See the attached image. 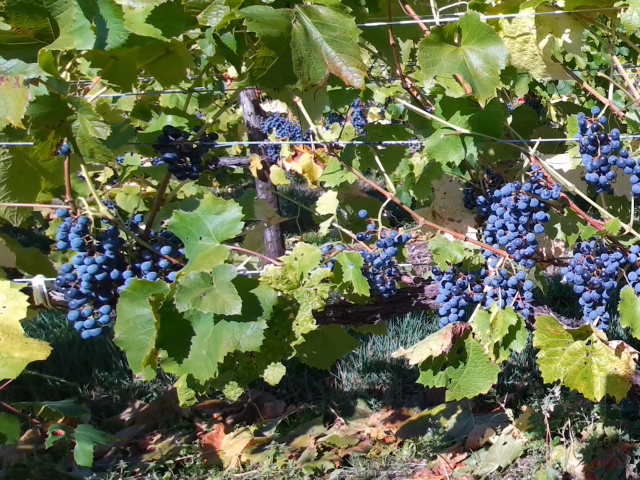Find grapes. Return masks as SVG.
Here are the masks:
<instances>
[{
  "mask_svg": "<svg viewBox=\"0 0 640 480\" xmlns=\"http://www.w3.org/2000/svg\"><path fill=\"white\" fill-rule=\"evenodd\" d=\"M640 266H637L635 270H631L626 274V280L630 282V285L635 289L637 293H640Z\"/></svg>",
  "mask_w": 640,
  "mask_h": 480,
  "instance_id": "1ff8f66d",
  "label": "grapes"
},
{
  "mask_svg": "<svg viewBox=\"0 0 640 480\" xmlns=\"http://www.w3.org/2000/svg\"><path fill=\"white\" fill-rule=\"evenodd\" d=\"M336 257H332L329 259L328 263L323 264V269L329 268V270H333L336 264Z\"/></svg>",
  "mask_w": 640,
  "mask_h": 480,
  "instance_id": "91a60905",
  "label": "grapes"
},
{
  "mask_svg": "<svg viewBox=\"0 0 640 480\" xmlns=\"http://www.w3.org/2000/svg\"><path fill=\"white\" fill-rule=\"evenodd\" d=\"M534 288V283L530 280H525L522 285L523 298L518 299L515 303V308L520 310V313L523 317H529L531 315V306H532V298L533 293L531 290Z\"/></svg>",
  "mask_w": 640,
  "mask_h": 480,
  "instance_id": "ef6de9ee",
  "label": "grapes"
},
{
  "mask_svg": "<svg viewBox=\"0 0 640 480\" xmlns=\"http://www.w3.org/2000/svg\"><path fill=\"white\" fill-rule=\"evenodd\" d=\"M162 132L158 136V140L152 145L155 152H161L163 161L168 165V171L172 173L179 181H185L188 177L190 180H197L198 173L203 171L201 164V155L208 153L214 145H198L195 148H185L184 152L181 147L171 145V139H188L189 133L180 129L164 125Z\"/></svg>",
  "mask_w": 640,
  "mask_h": 480,
  "instance_id": "5460f4e3",
  "label": "grapes"
},
{
  "mask_svg": "<svg viewBox=\"0 0 640 480\" xmlns=\"http://www.w3.org/2000/svg\"><path fill=\"white\" fill-rule=\"evenodd\" d=\"M480 252L484 258L489 259V265L491 267H496L501 260V255L493 253L485 248H480Z\"/></svg>",
  "mask_w": 640,
  "mask_h": 480,
  "instance_id": "54f908b8",
  "label": "grapes"
},
{
  "mask_svg": "<svg viewBox=\"0 0 640 480\" xmlns=\"http://www.w3.org/2000/svg\"><path fill=\"white\" fill-rule=\"evenodd\" d=\"M141 262H134L132 267L134 269H140L141 276L149 282H154L158 279V272L151 270L153 268V261L155 260L154 253L149 249H144L141 253Z\"/></svg>",
  "mask_w": 640,
  "mask_h": 480,
  "instance_id": "2adb6a1f",
  "label": "grapes"
},
{
  "mask_svg": "<svg viewBox=\"0 0 640 480\" xmlns=\"http://www.w3.org/2000/svg\"><path fill=\"white\" fill-rule=\"evenodd\" d=\"M411 238L412 234L410 232H403L399 235V231L394 230L389 233V236L383 234L381 239L375 241V246L382 249V253H373L366 248L358 250V253L366 263H372L373 270H368L365 273V277L374 282V286L383 298L398 294L395 281L392 279L399 272V268L396 267L395 261L392 259L393 256L398 254V248L394 243H406Z\"/></svg>",
  "mask_w": 640,
  "mask_h": 480,
  "instance_id": "83cd7487",
  "label": "grapes"
},
{
  "mask_svg": "<svg viewBox=\"0 0 640 480\" xmlns=\"http://www.w3.org/2000/svg\"><path fill=\"white\" fill-rule=\"evenodd\" d=\"M529 180L507 182L504 186L486 188V195L474 184L466 182L463 189V202L468 210L478 205L479 215H488L484 229L485 241L500 248L506 245V252L513 254V260L520 266L533 268L536 259L532 257L538 247L535 234L545 231L540 223L533 225V232L527 230L529 221L548 223L550 214L544 211L534 212L530 208H544L546 203L525 192L539 195L542 200L558 199L562 194V184L555 182L552 189L541 184L543 172L536 163L530 165Z\"/></svg>",
  "mask_w": 640,
  "mask_h": 480,
  "instance_id": "b958b902",
  "label": "grapes"
},
{
  "mask_svg": "<svg viewBox=\"0 0 640 480\" xmlns=\"http://www.w3.org/2000/svg\"><path fill=\"white\" fill-rule=\"evenodd\" d=\"M577 120L578 132L573 135L576 143H581L579 153L581 154V161L585 165V180L595 185V191L600 193L602 191L609 192L612 189V185L609 181L617 177V173L610 169V166H615L623 170L629 177V182L632 184L631 191L634 195H640V157L636 160L629 156V152L626 148H620L618 155L610 154L612 149H618L621 146L620 136L621 131L618 127H613L610 132V142L608 141V135L605 131L596 133L600 129V124L605 125L608 122L606 116H601L598 122H591L588 126V120L584 112H578L575 115ZM598 140L600 142V152L603 154L598 160H594V156L598 152Z\"/></svg>",
  "mask_w": 640,
  "mask_h": 480,
  "instance_id": "84f90ec7",
  "label": "grapes"
},
{
  "mask_svg": "<svg viewBox=\"0 0 640 480\" xmlns=\"http://www.w3.org/2000/svg\"><path fill=\"white\" fill-rule=\"evenodd\" d=\"M163 237L169 238L166 243L154 242L152 249L160 253V257L157 259L156 267L158 269H168L170 267V261L164 257V255L170 254L174 258H179L186 253V250L179 245L182 240L169 230H163L161 232Z\"/></svg>",
  "mask_w": 640,
  "mask_h": 480,
  "instance_id": "e5b3c951",
  "label": "grapes"
},
{
  "mask_svg": "<svg viewBox=\"0 0 640 480\" xmlns=\"http://www.w3.org/2000/svg\"><path fill=\"white\" fill-rule=\"evenodd\" d=\"M56 215L64 218L63 223L57 226L55 239L58 240L59 250L79 252L71 257V263L65 262L60 266V272L54 278V288L57 291H65L63 299L68 302L70 309H77L89 300V297L103 303L97 312L101 315L97 319L88 317L94 314L92 309L71 310L67 314V320L75 331L80 332L82 340L98 337L103 328L111 322V305L105 303L111 299V290L115 288L117 293L122 292L133 278V272L125 262V255L118 252L125 244L121 230L115 226L107 227L105 235H98L96 240L97 252L103 255L95 257L92 250L93 244L82 238L90 233L88 226L91 219L87 216H79L75 224L68 209H57Z\"/></svg>",
  "mask_w": 640,
  "mask_h": 480,
  "instance_id": "01657485",
  "label": "grapes"
},
{
  "mask_svg": "<svg viewBox=\"0 0 640 480\" xmlns=\"http://www.w3.org/2000/svg\"><path fill=\"white\" fill-rule=\"evenodd\" d=\"M433 281L439 283V293L436 297L437 303H443L439 308L441 315L439 327L444 328L452 322H457L458 317H463L471 300L473 302L485 301V306L490 307L493 304V296L496 288L500 287L501 298L497 300V307L505 308L515 299L517 285L519 281L526 278V272L519 270L516 275L509 276L507 268H500L498 276H486L484 285L490 286L487 293H483L484 286L476 283L475 271H463L462 275L465 279H458L454 273V268L442 271L439 267L432 268Z\"/></svg>",
  "mask_w": 640,
  "mask_h": 480,
  "instance_id": "f8a65327",
  "label": "grapes"
},
{
  "mask_svg": "<svg viewBox=\"0 0 640 480\" xmlns=\"http://www.w3.org/2000/svg\"><path fill=\"white\" fill-rule=\"evenodd\" d=\"M573 252L574 259L569 261V267L563 266L561 274L569 284H574L573 291L582 294L579 304L583 306L582 319L597 321L598 329H607L610 314L606 307L614 289L618 287V267L621 264L636 263L640 246L633 244L627 256L593 235L587 241L578 242Z\"/></svg>",
  "mask_w": 640,
  "mask_h": 480,
  "instance_id": "0513c4c2",
  "label": "grapes"
}]
</instances>
